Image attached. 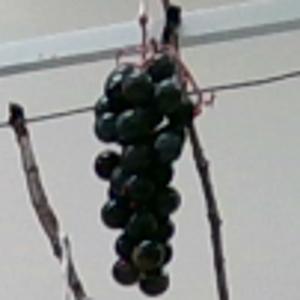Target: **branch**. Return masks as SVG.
I'll use <instances>...</instances> for the list:
<instances>
[{
    "label": "branch",
    "instance_id": "obj_1",
    "mask_svg": "<svg viewBox=\"0 0 300 300\" xmlns=\"http://www.w3.org/2000/svg\"><path fill=\"white\" fill-rule=\"evenodd\" d=\"M8 125L14 132V138L20 150L19 161L31 204L37 214L41 230L50 242L58 268L75 300H92L75 270L69 234H64L52 208V203L45 193L40 168L36 163L34 147L30 139V129L25 124L24 107L18 102H8Z\"/></svg>",
    "mask_w": 300,
    "mask_h": 300
},
{
    "label": "branch",
    "instance_id": "obj_2",
    "mask_svg": "<svg viewBox=\"0 0 300 300\" xmlns=\"http://www.w3.org/2000/svg\"><path fill=\"white\" fill-rule=\"evenodd\" d=\"M187 137L192 147V160L195 162L194 173L201 182V193L205 203L208 233L210 235L211 261L216 275V290L218 300H230L227 284V266L224 256V235L222 228L224 221L218 209L216 191L211 173V160L205 156V148L197 133L195 118L186 125Z\"/></svg>",
    "mask_w": 300,
    "mask_h": 300
},
{
    "label": "branch",
    "instance_id": "obj_3",
    "mask_svg": "<svg viewBox=\"0 0 300 300\" xmlns=\"http://www.w3.org/2000/svg\"><path fill=\"white\" fill-rule=\"evenodd\" d=\"M163 21L160 37V51L168 50L181 60L182 7L171 0H161Z\"/></svg>",
    "mask_w": 300,
    "mask_h": 300
}]
</instances>
